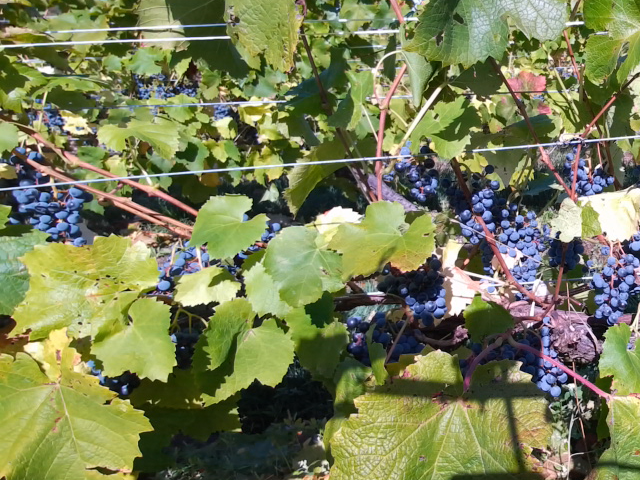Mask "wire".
Wrapping results in <instances>:
<instances>
[{"label":"wire","mask_w":640,"mask_h":480,"mask_svg":"<svg viewBox=\"0 0 640 480\" xmlns=\"http://www.w3.org/2000/svg\"><path fill=\"white\" fill-rule=\"evenodd\" d=\"M371 33L372 35H376V33H399V29L396 30H354V31H340L337 33V36H343L346 34H354L361 35Z\"/></svg>","instance_id":"wire-7"},{"label":"wire","mask_w":640,"mask_h":480,"mask_svg":"<svg viewBox=\"0 0 640 480\" xmlns=\"http://www.w3.org/2000/svg\"><path fill=\"white\" fill-rule=\"evenodd\" d=\"M384 294H385V292H379L378 290L363 291V292H359V293L351 294V295L336 296L335 300L336 301L354 300V299H358V298L365 297V296L384 295Z\"/></svg>","instance_id":"wire-6"},{"label":"wire","mask_w":640,"mask_h":480,"mask_svg":"<svg viewBox=\"0 0 640 480\" xmlns=\"http://www.w3.org/2000/svg\"><path fill=\"white\" fill-rule=\"evenodd\" d=\"M206 39H230V36H190V37H167V38H130V39H97V40H88V41H79V42H47V43H29V44H13V45H0V48H15V47H31V46H49V45H81V44H90V43H99V44H115L122 42H173V41H202Z\"/></svg>","instance_id":"wire-3"},{"label":"wire","mask_w":640,"mask_h":480,"mask_svg":"<svg viewBox=\"0 0 640 480\" xmlns=\"http://www.w3.org/2000/svg\"><path fill=\"white\" fill-rule=\"evenodd\" d=\"M387 21H401V22H418V17H403V16H385V17H371V18H320V19H304V24H322V23H373V22H387Z\"/></svg>","instance_id":"wire-4"},{"label":"wire","mask_w":640,"mask_h":480,"mask_svg":"<svg viewBox=\"0 0 640 480\" xmlns=\"http://www.w3.org/2000/svg\"><path fill=\"white\" fill-rule=\"evenodd\" d=\"M624 138L640 139V135H621V136H615V137H610V138H597V139H585V140H567V141H560V142H555V143H536V144H531V145H512V146H506V147L478 148V149L466 150V153H473V152H480V151L508 150V149H514V148H533V147H538V146L553 147V146L562 145V144L613 141V140L624 139Z\"/></svg>","instance_id":"wire-5"},{"label":"wire","mask_w":640,"mask_h":480,"mask_svg":"<svg viewBox=\"0 0 640 480\" xmlns=\"http://www.w3.org/2000/svg\"><path fill=\"white\" fill-rule=\"evenodd\" d=\"M430 155H441V152H428L424 154L407 155V156H382V157H364V158H350V159H331L326 161H305V162H294V163L265 164V165L252 166V167H229V168H222V169H204L201 171L167 172V173H158L154 175H134L130 177H114V178H106V179H99V180L72 181V182H63V183H49V184L35 185V186L30 185V186H24V187L0 188V191L27 190L32 188H45V187H52V186H65V185H74V184H91V183H101V182H109V181H116V180H133L136 178H157L160 176H169V175L210 174V173L230 172L232 170L274 169L275 167L297 166V165H308V164L324 165V164L352 162V161L410 159V158H418V157H427Z\"/></svg>","instance_id":"wire-1"},{"label":"wire","mask_w":640,"mask_h":480,"mask_svg":"<svg viewBox=\"0 0 640 480\" xmlns=\"http://www.w3.org/2000/svg\"><path fill=\"white\" fill-rule=\"evenodd\" d=\"M209 27L214 28H225V23H216V22H206L205 24L199 23H179V24H170L166 26L161 25H138V26H121V27H112V28H100V27H86V28H77L71 30H43L44 35H74L79 33H88V32H98V33H114V32H123V31H140V30H159V31H168L173 29H181V28H197V29H208Z\"/></svg>","instance_id":"wire-2"}]
</instances>
